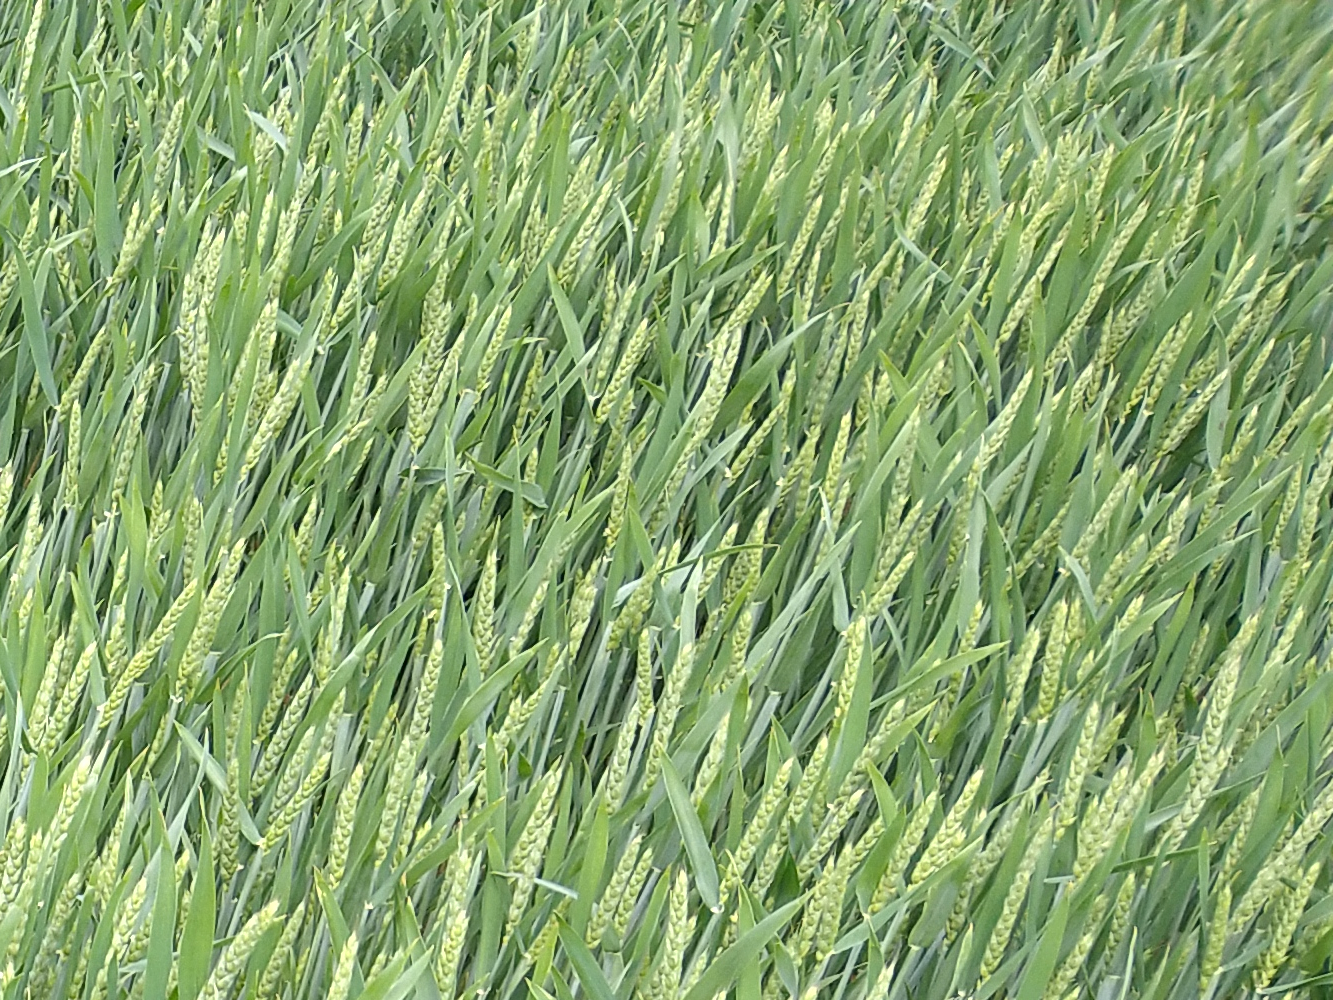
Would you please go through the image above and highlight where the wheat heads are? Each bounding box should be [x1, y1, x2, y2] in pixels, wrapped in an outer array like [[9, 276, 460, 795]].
[[585, 833, 643, 942], [1125, 536, 1174, 587], [147, 479, 168, 525], [903, 663, 941, 720], [372, 740, 415, 861], [296, 887, 319, 961], [184, 495, 203, 585], [253, 188, 276, 257], [113, 368, 155, 501], [206, 193, 237, 231], [875, 500, 926, 585], [56, 609, 85, 688], [1023, 153, 1050, 213], [150, 510, 173, 553], [632, 628, 654, 724], [1020, 201, 1054, 256], [1005, 213, 1078, 348], [796, 789, 866, 884], [692, 329, 741, 446], [777, 195, 824, 285], [690, 602, 730, 663], [1092, 147, 1114, 215], [425, 51, 472, 165], [177, 540, 248, 693], [117, 962, 185, 1000], [972, 819, 1050, 979], [714, 181, 734, 249], [595, 704, 636, 812], [1304, 442, 1333, 504], [731, 615, 750, 679], [1033, 448, 1061, 503], [792, 423, 816, 521], [1109, 280, 1159, 357], [1128, 233, 1160, 284], [503, 763, 562, 878], [522, 193, 543, 267], [397, 769, 431, 858], [1266, 395, 1311, 458], [1079, 650, 1096, 683], [771, 368, 795, 465], [975, 372, 1031, 476], [831, 611, 867, 728], [189, 219, 216, 281], [940, 811, 986, 936], [1029, 44, 1064, 99], [374, 189, 430, 293], [474, 700, 524, 789], [0, 825, 30, 955], [1260, 810, 1294, 870], [1063, 597, 1083, 646], [26, 871, 85, 1000], [931, 604, 982, 743], [468, 549, 495, 660], [54, 919, 94, 1000], [449, 84, 488, 183], [51, 643, 97, 733], [1230, 615, 1258, 650], [731, 404, 785, 471], [1271, 462, 1297, 547], [874, 372, 890, 422], [795, 230, 822, 318], [884, 319, 911, 370], [1159, 926, 1196, 1000], [90, 805, 130, 902], [826, 192, 846, 243], [513, 349, 546, 431], [429, 189, 467, 258], [331, 771, 367, 874], [51, 251, 76, 299], [972, 148, 1014, 229], [1114, 595, 1144, 646], [856, 195, 876, 247], [306, 71, 349, 165], [594, 283, 636, 384], [269, 626, 296, 690], [654, 160, 690, 230], [123, 848, 192, 963], [640, 641, 694, 793], [503, 812, 551, 947], [152, 97, 166, 134], [1169, 495, 1191, 562], [209, 230, 226, 294], [1066, 765, 1127, 897], [1088, 10, 1116, 107], [562, 183, 612, 293], [855, 368, 872, 423], [150, 99, 186, 199], [172, 902, 280, 1000], [16, 3, 40, 95], [478, 470, 501, 513], [623, 923, 695, 1000], [1230, 272, 1266, 341], [900, 149, 944, 230], [314, 549, 339, 602], [421, 316, 476, 435], [666, 540, 682, 572], [681, 947, 707, 1000], [1182, 162, 1207, 251], [116, 879, 145, 940], [1088, 313, 1116, 400], [1048, 312, 1078, 368], [558, 162, 590, 230], [719, 759, 798, 895], [803, 134, 840, 198], [821, 410, 850, 514], [425, 305, 452, 367], [564, 48, 585, 102], [308, 171, 335, 257], [885, 419, 920, 523], [259, 649, 300, 734], [1183, 650, 1242, 798], [526, 111, 540, 180], [1222, 795, 1261, 886], [816, 322, 850, 421], [317, 267, 338, 324], [896, 71, 922, 126], [1244, 338, 1275, 390], [810, 103, 836, 144], [1082, 897, 1108, 936], [703, 187, 721, 230], [817, 840, 853, 953], [104, 636, 125, 675], [122, 199, 141, 263], [1005, 625, 1040, 738], [797, 861, 834, 958], [1015, 509, 1042, 556], [1166, 5, 1189, 85], [369, 166, 401, 239], [987, 203, 1015, 265], [484, 93, 511, 189], [26, 638, 70, 739], [225, 676, 249, 762], [604, 551, 663, 647], [215, 370, 279, 483], [110, 547, 129, 601], [532, 901, 568, 957], [161, 15, 173, 53], [1095, 876, 1140, 978], [1257, 861, 1321, 986], [1167, 370, 1228, 453], [598, 394, 632, 477], [372, 133, 394, 170], [741, 276, 772, 325], [911, 775, 985, 884], [872, 796, 939, 913], [430, 513, 444, 597], [1232, 273, 1294, 354], [640, 442, 696, 540], [330, 210, 344, 238], [1166, 357, 1217, 410], [273, 212, 294, 254], [228, 299, 269, 425], [253, 754, 333, 873], [271, 210, 302, 282], [549, 47, 579, 98], [854, 107, 877, 142], [474, 769, 492, 822], [454, 733, 470, 804], [1209, 781, 1256, 853], [119, 208, 164, 279], [332, 239, 390, 326], [1150, 399, 1194, 458], [816, 481, 845, 570], [683, 51, 723, 112], [438, 860, 483, 1000], [1196, 459, 1229, 532], [1152, 749, 1231, 866], [912, 76, 938, 124], [0, 665, 5, 715], [220, 757, 240, 878], [306, 689, 347, 762], [949, 477, 973, 573], [996, 451, 1037, 514], [801, 313, 836, 412], [600, 90, 622, 144], [266, 102, 292, 135], [1212, 313, 1253, 367], [938, 312, 969, 396], [727, 513, 765, 608], [255, 680, 310, 795], [1119, 331, 1178, 413], [905, 504, 941, 551], [692, 711, 732, 797], [717, 265, 753, 327], [16, 496, 41, 574], [26, 244, 46, 273], [1086, 712, 1124, 761], [1258, 609, 1302, 687], [323, 934, 359, 1000], [0, 471, 16, 539], [1231, 690, 1271, 753], [343, 331, 376, 419], [632, 52, 669, 117], [1074, 466, 1134, 560], [603, 275, 617, 329], [0, 216, 36, 313], [409, 644, 443, 750], [759, 146, 789, 201], [1224, 404, 1256, 477], [302, 27, 328, 70], [65, 397, 79, 480], [1285, 339, 1310, 389], [524, 671, 555, 721], [748, 94, 789, 158], [1092, 208, 1146, 288], [845, 291, 871, 380], [235, 213, 250, 257], [1013, 320, 1037, 366], [1063, 290, 1102, 367], [696, 527, 737, 599], [603, 316, 649, 419], [1257, 285, 1287, 336], [13, 592, 35, 647], [410, 473, 463, 546], [515, 26, 530, 76], [317, 573, 352, 675], [479, 311, 512, 387], [1087, 442, 1109, 481], [860, 551, 915, 627], [912, 361, 946, 422], [349, 380, 387, 486], [1173, 625, 1210, 718], [1050, 143, 1077, 193], [563, 570, 603, 663], [441, 849, 473, 906], [1229, 258, 1253, 300], [69, 112, 85, 199], [761, 942, 803, 1000], [778, 439, 807, 501], [1092, 549, 1132, 604], [621, 851, 654, 928], [271, 728, 314, 815], [363, 702, 397, 772], [954, 169, 973, 221], [14, 103, 31, 154], [572, 71, 599, 120], [191, 302, 210, 425], [291, 174, 319, 213], [628, 134, 676, 240], [1147, 309, 1194, 412], [837, 702, 904, 807], [150, 717, 168, 767], [709, 327, 731, 385], [1040, 602, 1066, 710], [251, 130, 273, 187], [11, 840, 47, 960], [509, 578, 548, 660], [888, 250, 905, 295], [60, 326, 111, 406], [1061, 55, 1093, 114], [608, 444, 634, 546], [1068, 358, 1106, 409], [38, 766, 92, 884], [1014, 497, 1073, 567], [173, 276, 198, 380], [183, 163, 194, 207], [97, 585, 197, 730], [1226, 790, 1333, 926], [745, 83, 772, 135], [1270, 510, 1317, 605], [1079, 794, 1098, 840], [322, 102, 363, 192], [79, 948, 115, 1000], [402, 362, 429, 445], [252, 901, 305, 1000], [364, 956, 388, 987], [851, 816, 885, 864], [1039, 932, 1096, 1000], [244, 357, 312, 482], [730, 271, 766, 326], [887, 123, 928, 199], [418, 265, 451, 338], [758, 735, 830, 892], [1112, 23, 1171, 83], [654, 870, 690, 1000], [394, 42, 410, 84], [1103, 754, 1162, 850], [524, 412, 541, 485], [1197, 887, 1233, 989], [296, 489, 316, 568], [1050, 703, 1102, 830]]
